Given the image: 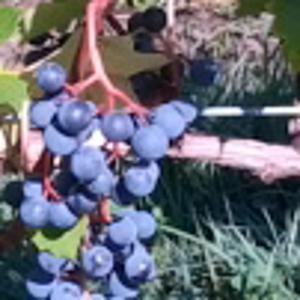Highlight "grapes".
Segmentation results:
<instances>
[{"label":"grapes","instance_id":"grapes-1","mask_svg":"<svg viewBox=\"0 0 300 300\" xmlns=\"http://www.w3.org/2000/svg\"><path fill=\"white\" fill-rule=\"evenodd\" d=\"M62 64L43 62L35 82L43 96L30 107L43 147L65 157L55 189L64 199L43 197V180L29 174L5 188L8 202L32 230L65 231L86 217L76 262L50 251L33 253L25 282L32 300H131L156 271L146 242L156 237L153 213L143 199L159 187L169 144L180 141L199 115L192 95H176L149 111L103 115L88 96H68Z\"/></svg>","mask_w":300,"mask_h":300}]
</instances>
